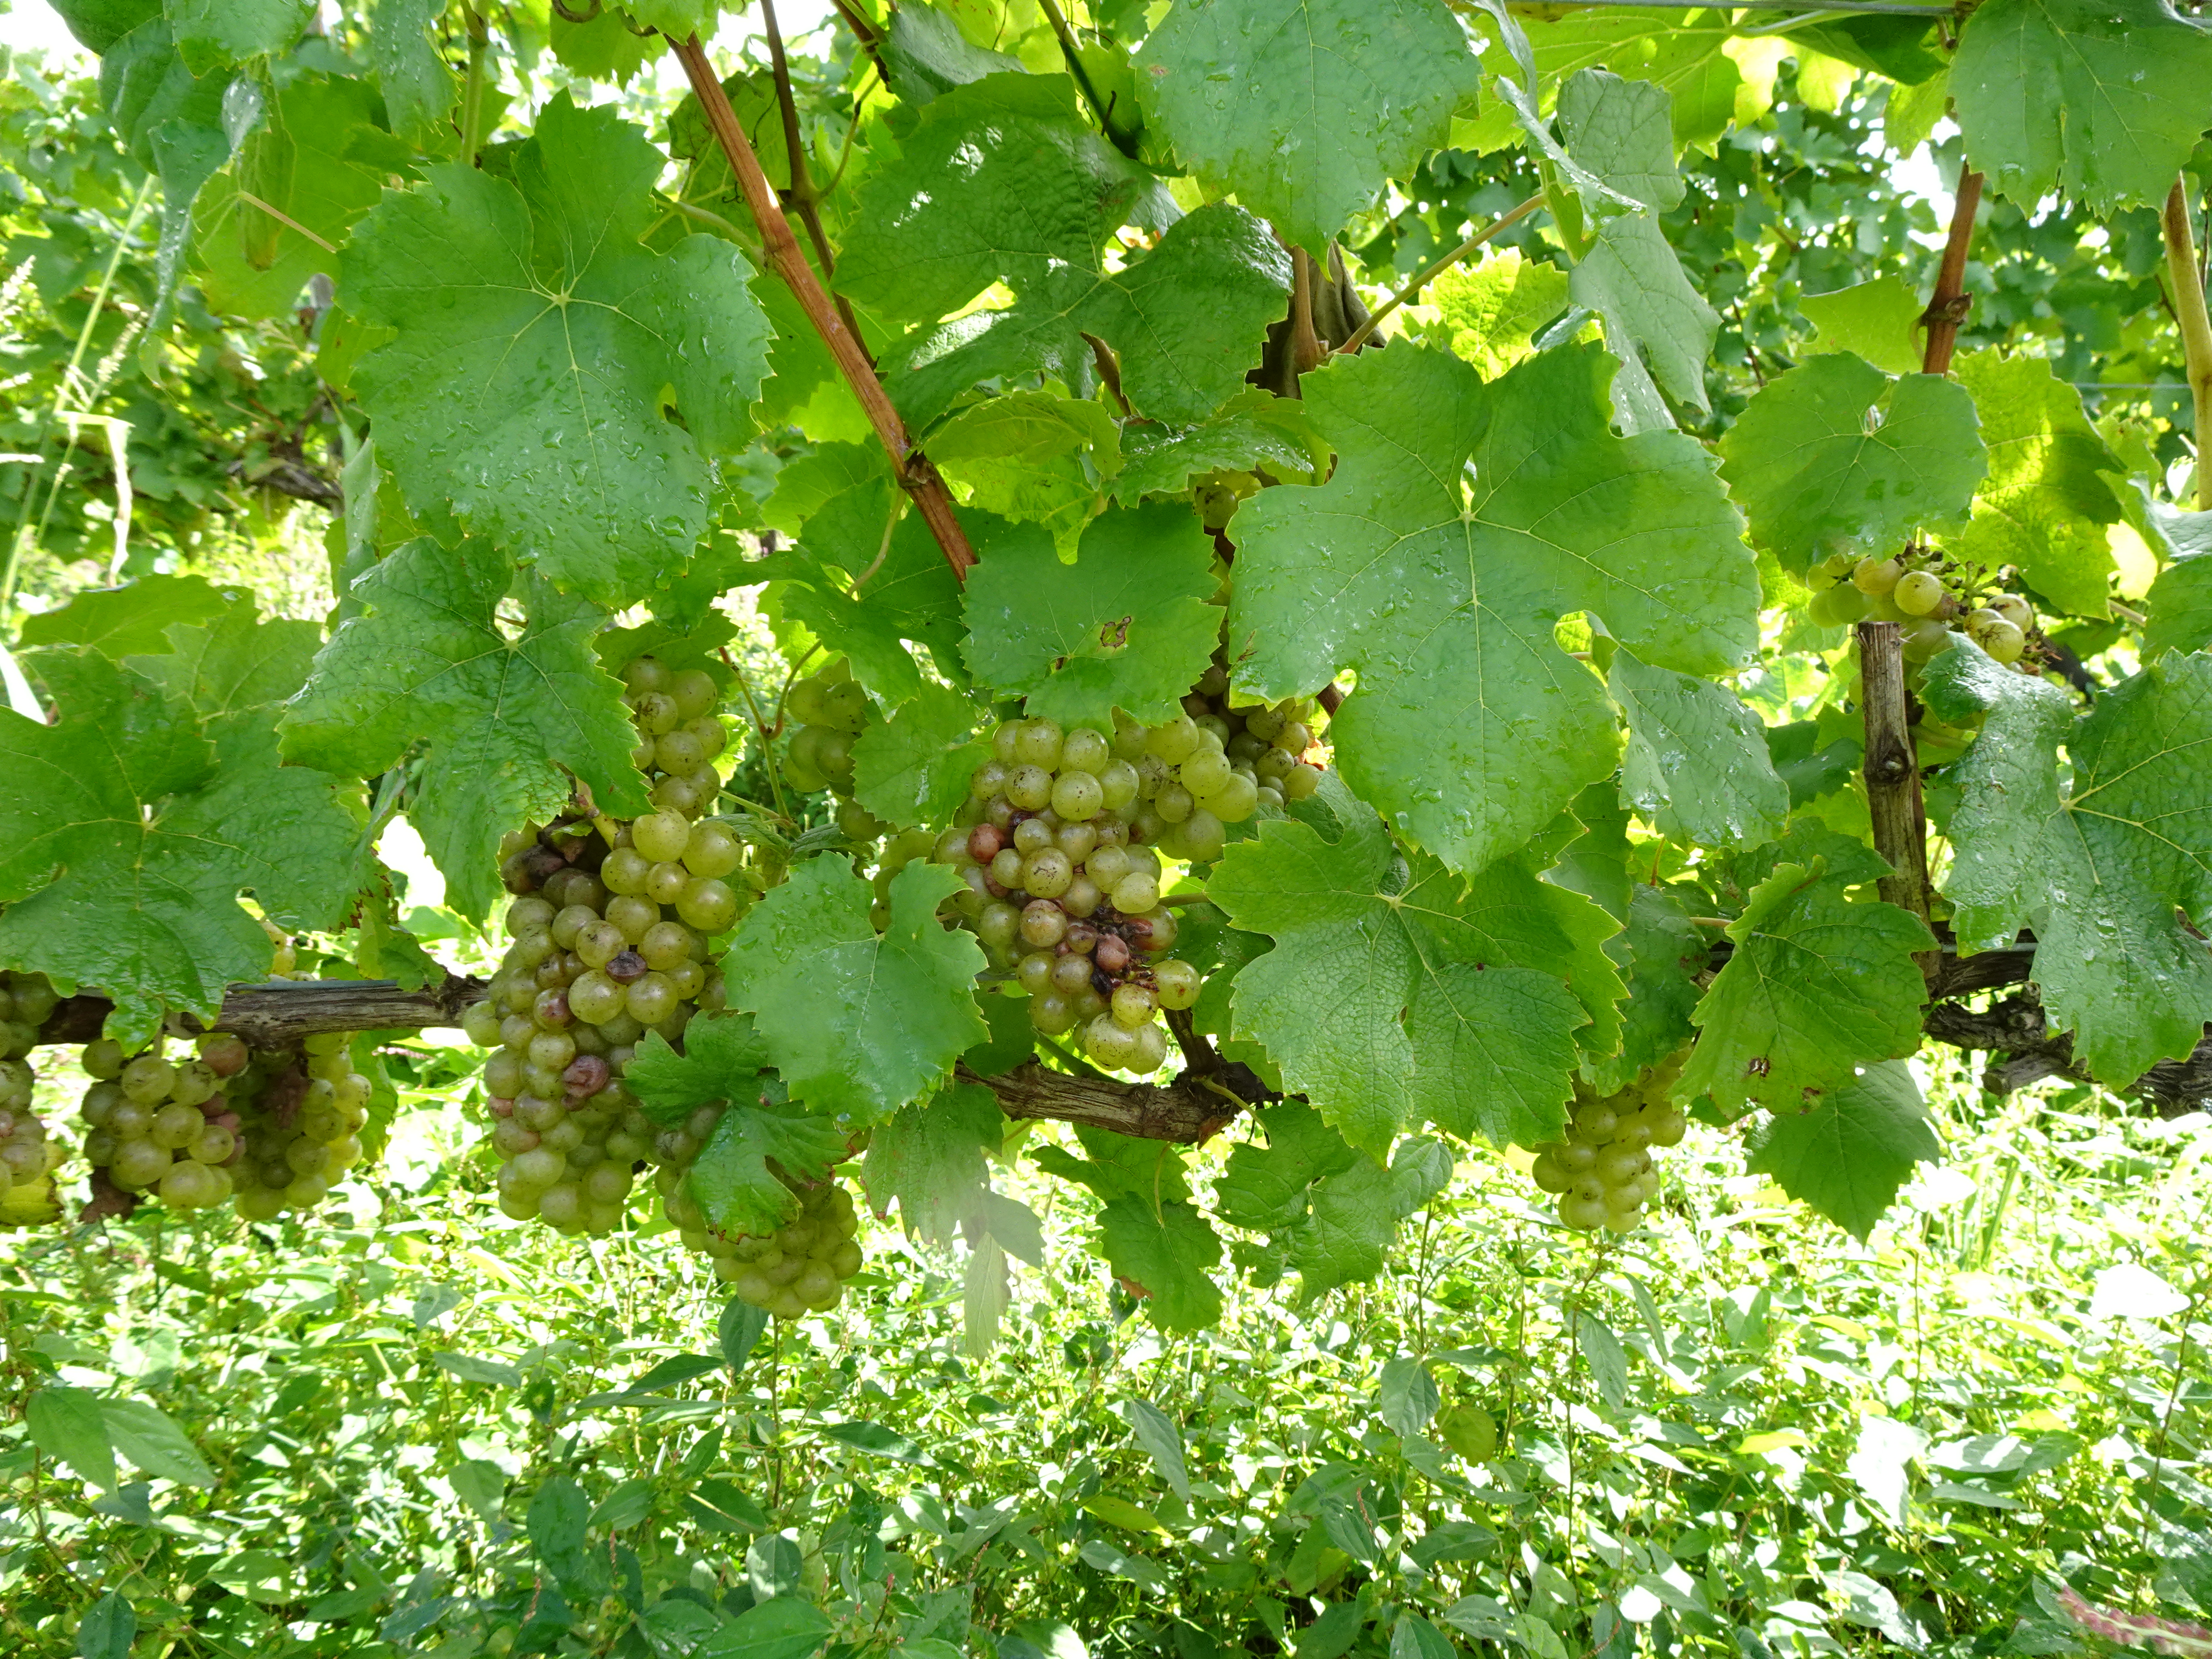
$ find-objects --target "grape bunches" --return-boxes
[656,1103,872,1321]
[780,658,913,841]
[1193,466,1262,528]
[1521,1042,1694,1233]
[1909,594,2034,738]
[566,805,742,1043]
[618,656,727,811]
[1185,589,1322,810]
[464,870,666,1237]
[196,921,372,1221]
[83,1038,231,1210]
[0,972,61,1191]
[498,820,611,894]
[1805,553,1944,705]
[869,828,935,931]
[934,718,1199,1075]
[1109,707,1258,864]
